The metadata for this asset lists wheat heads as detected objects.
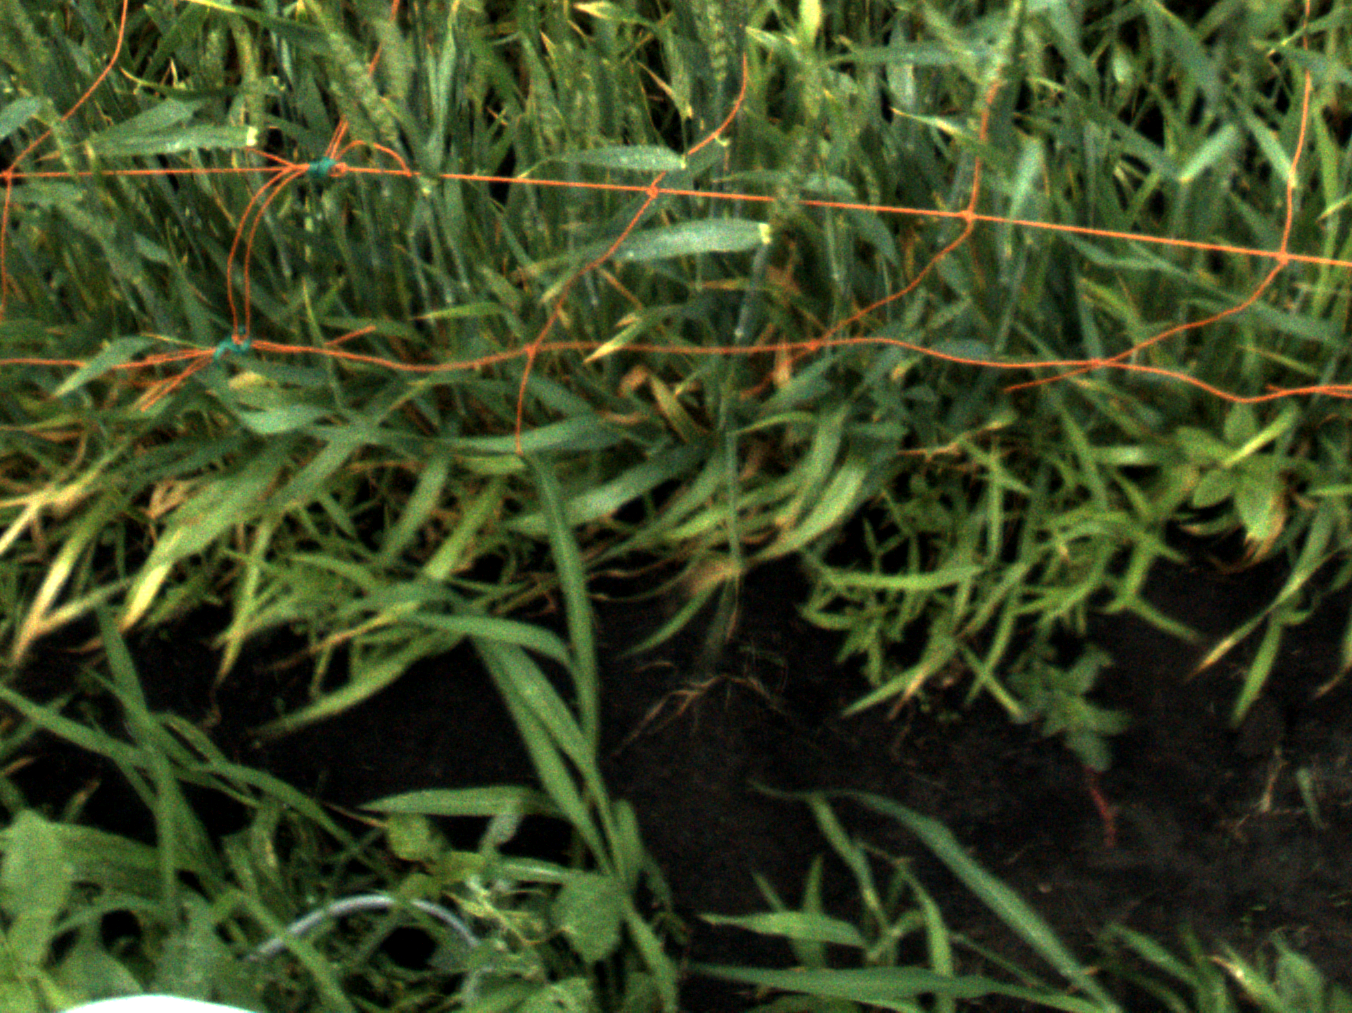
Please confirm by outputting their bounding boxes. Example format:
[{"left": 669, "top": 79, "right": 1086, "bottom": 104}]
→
[
  {"left": 45, "top": 94, "right": 79, "bottom": 168},
  {"left": 113, "top": 172, "right": 163, "bottom": 224},
  {"left": 317, "top": 35, "right": 403, "bottom": 147},
  {"left": 657, "top": 22, "right": 693, "bottom": 121},
  {"left": 923, "top": 0, "right": 982, "bottom": 83},
  {"left": 622, "top": 98, "right": 652, "bottom": 147},
  {"left": 143, "top": 0, "right": 175, "bottom": 29},
  {"left": 684, "top": 0, "right": 711, "bottom": 44},
  {"left": 562, "top": 67, "right": 602, "bottom": 148},
  {"left": 963, "top": 0, "right": 1022, "bottom": 125},
  {"left": 859, "top": 158, "right": 884, "bottom": 207},
  {"left": 767, "top": 138, "right": 817, "bottom": 223},
  {"left": 1022, "top": 20, "right": 1046, "bottom": 93},
  {"left": 0, "top": 0, "right": 49, "bottom": 56},
  {"left": 825, "top": 83, "right": 854, "bottom": 138},
  {"left": 241, "top": 58, "right": 269, "bottom": 130},
  {"left": 716, "top": 0, "right": 747, "bottom": 20},
  {"left": 53, "top": 197, "right": 117, "bottom": 243},
  {"left": 42, "top": 10, "right": 64, "bottom": 37},
  {"left": 198, "top": 21, "right": 224, "bottom": 93},
  {"left": 525, "top": 62, "right": 562, "bottom": 141},
  {"left": 697, "top": 0, "right": 733, "bottom": 84},
  {"left": 1236, "top": 0, "right": 1274, "bottom": 28},
  {"left": 800, "top": 43, "right": 827, "bottom": 117},
  {"left": 366, "top": 10, "right": 408, "bottom": 102}
]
